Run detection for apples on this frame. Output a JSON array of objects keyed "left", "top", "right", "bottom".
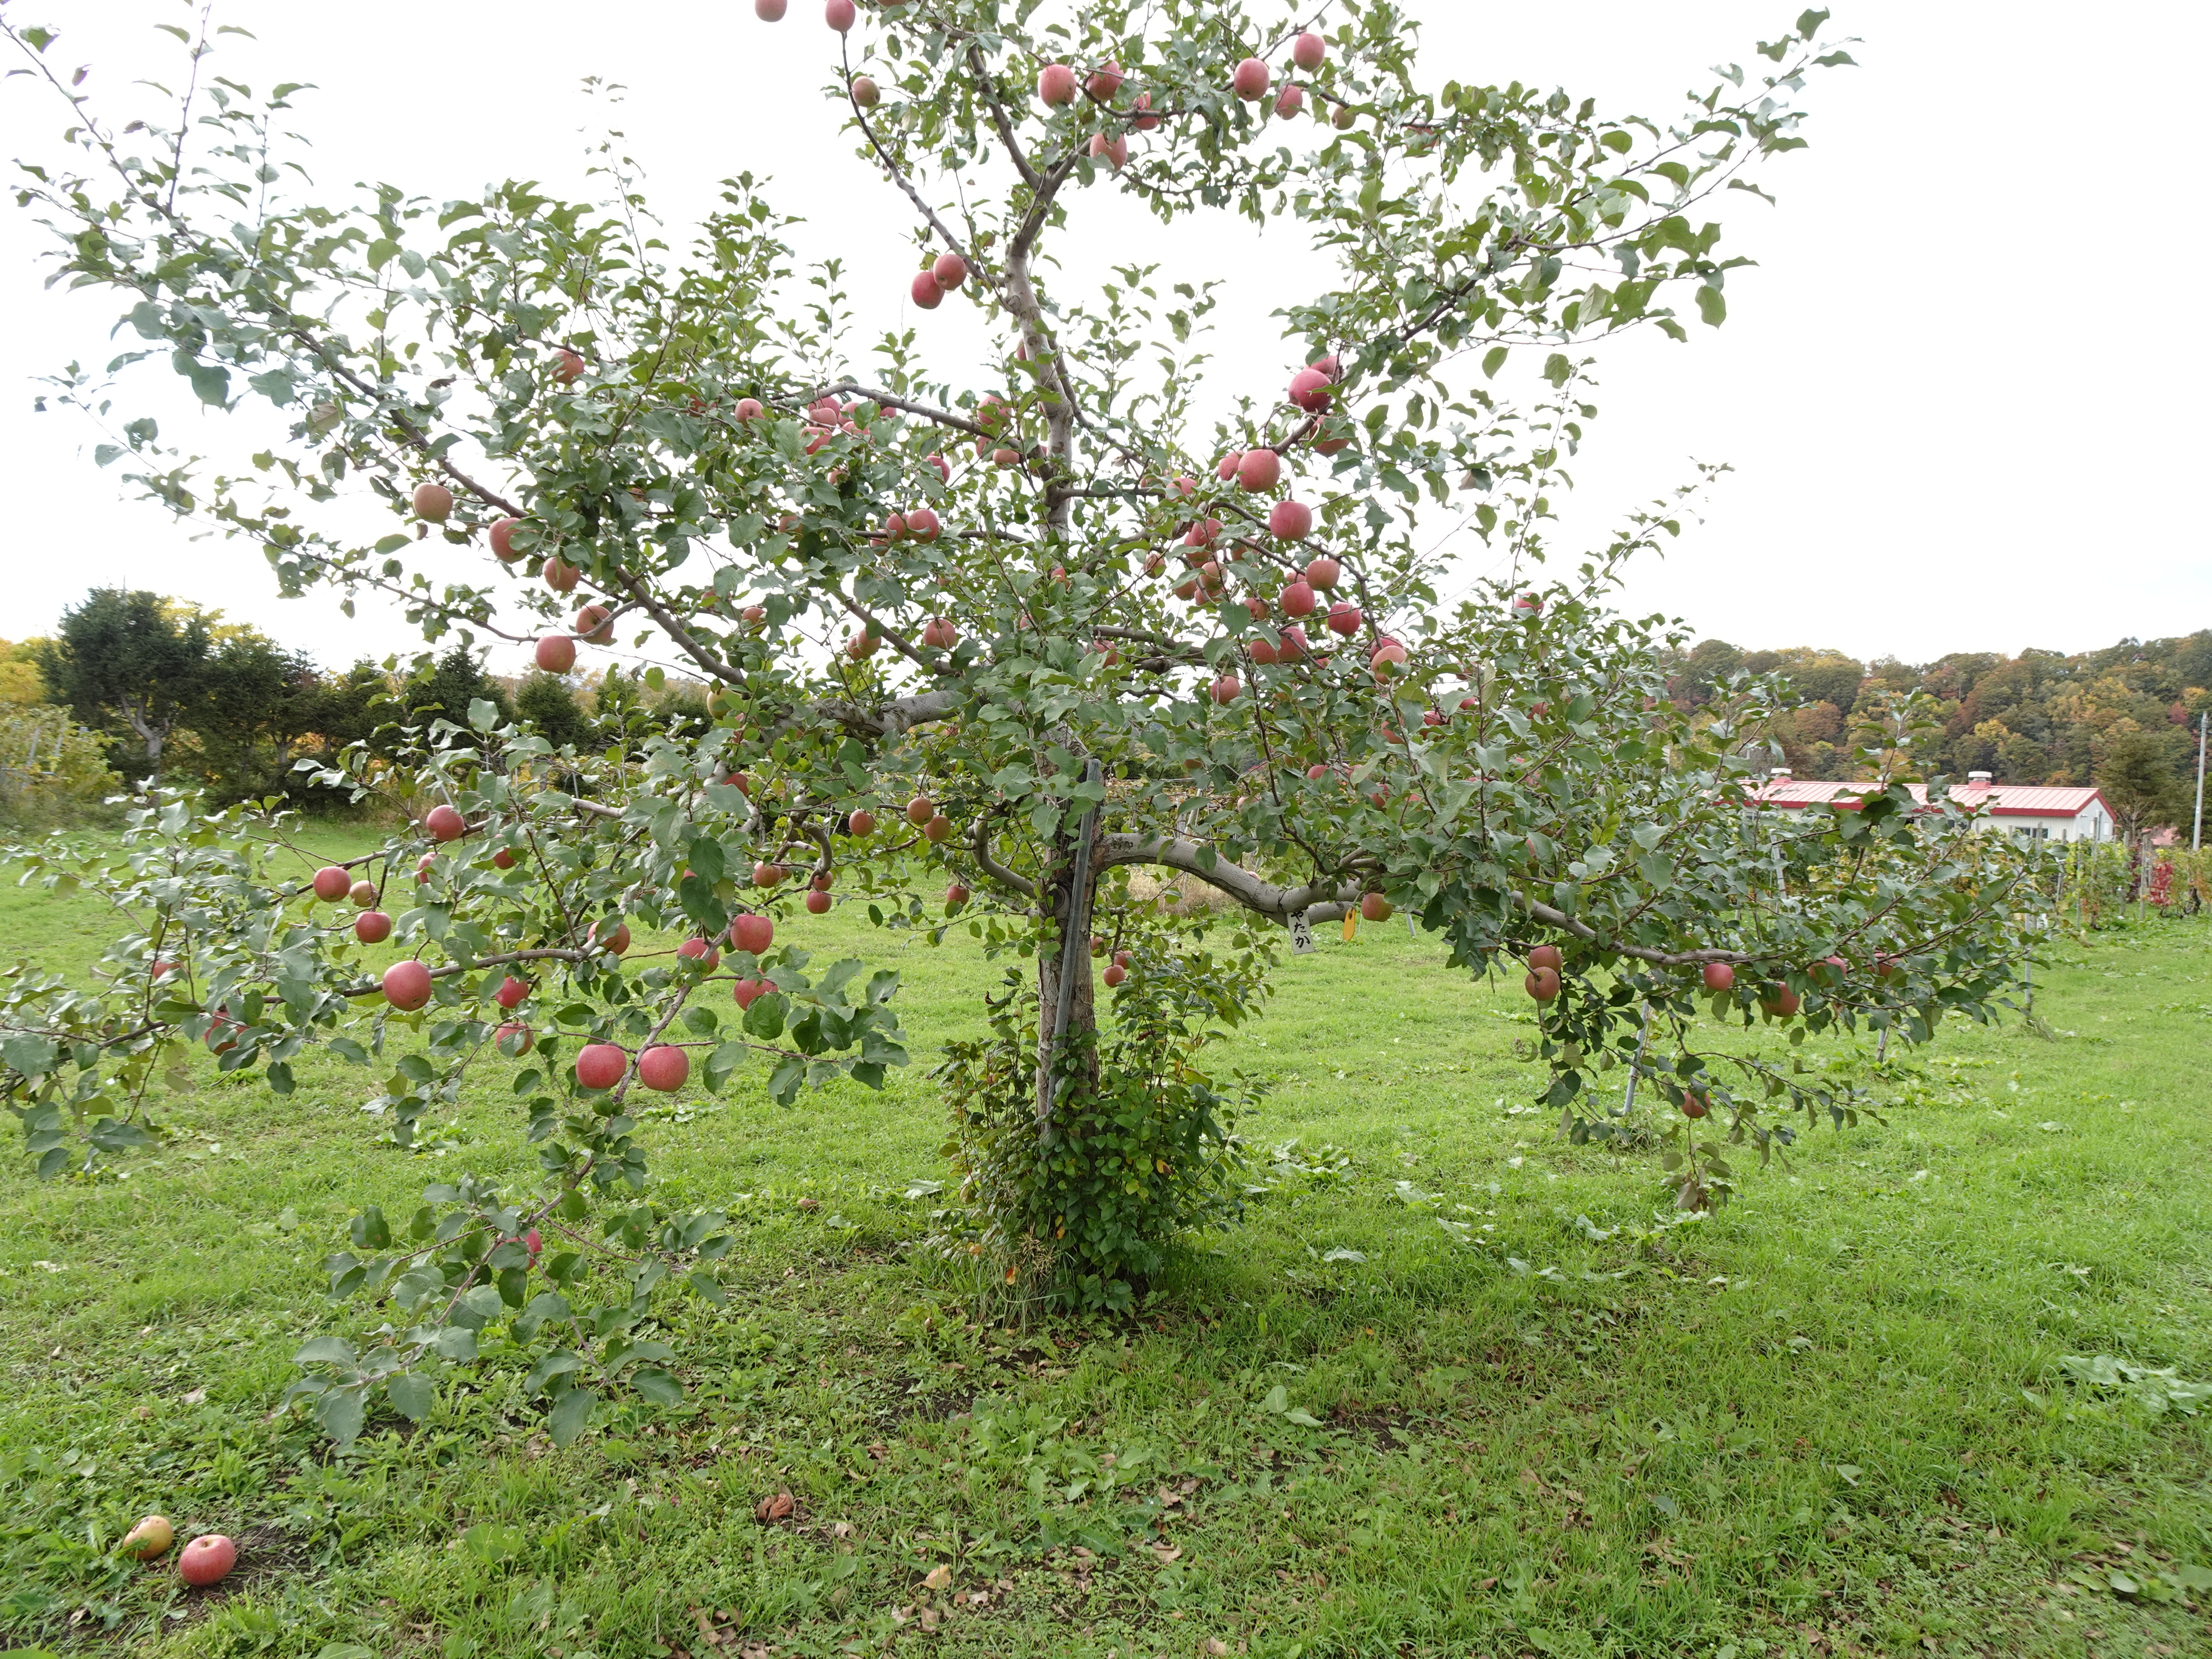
[
  {"left": 729, "top": 913, "right": 775, "bottom": 956},
  {"left": 841, "top": 419, "right": 872, "bottom": 447},
  {"left": 1276, "top": 625, "right": 1308, "bottom": 663},
  {"left": 922, "top": 619, "right": 956, "bottom": 656},
  {"left": 1306, "top": 763, "right": 1340, "bottom": 797},
  {"left": 1114, "top": 948, "right": 1137, "bottom": 972},
  {"left": 1764, "top": 980, "right": 1801, "bottom": 1017},
  {"left": 1381, "top": 710, "right": 1413, "bottom": 745},
  {"left": 799, "top": 425, "right": 831, "bottom": 458},
  {"left": 732, "top": 965, "right": 780, "bottom": 1014},
  {"left": 869, "top": 529, "right": 891, "bottom": 557},
  {"left": 1087, "top": 127, "right": 1128, "bottom": 173},
  {"left": 1088, "top": 933, "right": 1111, "bottom": 959},
  {"left": 1525, "top": 966, "right": 1561, "bottom": 1001},
  {"left": 1237, "top": 870, "right": 1262, "bottom": 891},
  {"left": 848, "top": 809, "right": 877, "bottom": 839},
  {"left": 1269, "top": 499, "right": 1313, "bottom": 541},
  {"left": 872, "top": 0, "right": 918, "bottom": 16},
  {"left": 1235, "top": 793, "right": 1262, "bottom": 822},
  {"left": 1271, "top": 687, "right": 1300, "bottom": 716},
  {"left": 151, "top": 959, "right": 188, "bottom": 985},
  {"left": 857, "top": 627, "right": 882, "bottom": 654},
  {"left": 1281, "top": 572, "right": 1312, "bottom": 594},
  {"left": 543, "top": 551, "right": 581, "bottom": 591},
  {"left": 1402, "top": 790, "right": 1424, "bottom": 815},
  {"left": 382, "top": 958, "right": 434, "bottom": 1011},
  {"left": 1281, "top": 739, "right": 1305, "bottom": 768},
  {"left": 1287, "top": 367, "right": 1333, "bottom": 418},
  {"left": 1183, "top": 757, "right": 1205, "bottom": 776},
  {"left": 1455, "top": 655, "right": 1478, "bottom": 682},
  {"left": 1050, "top": 564, "right": 1084, "bottom": 594},
  {"left": 1530, "top": 702, "right": 1555, "bottom": 724},
  {"left": 721, "top": 770, "right": 762, "bottom": 802},
  {"left": 688, "top": 390, "right": 719, "bottom": 419},
  {"left": 806, "top": 406, "right": 838, "bottom": 434},
  {"left": 536, "top": 635, "right": 576, "bottom": 673},
  {"left": 1305, "top": 558, "right": 1341, "bottom": 591},
  {"left": 1129, "top": 92, "right": 1164, "bottom": 131},
  {"left": 1366, "top": 783, "right": 1392, "bottom": 809},
  {"left": 490, "top": 832, "right": 527, "bottom": 870},
  {"left": 1330, "top": 103, "right": 1358, "bottom": 131},
  {"left": 1179, "top": 505, "right": 1230, "bottom": 554},
  {"left": 699, "top": 586, "right": 731, "bottom": 613},
  {"left": 586, "top": 918, "right": 632, "bottom": 960},
  {"left": 1272, "top": 82, "right": 1304, "bottom": 121},
  {"left": 1201, "top": 560, "right": 1228, "bottom": 593},
  {"left": 495, "top": 970, "right": 531, "bottom": 1008},
  {"left": 1232, "top": 57, "right": 1270, "bottom": 103},
  {"left": 840, "top": 400, "right": 868, "bottom": 427},
  {"left": 1510, "top": 757, "right": 1534, "bottom": 777},
  {"left": 905, "top": 507, "right": 941, "bottom": 544},
  {"left": 684, "top": 864, "right": 715, "bottom": 895},
  {"left": 1524, "top": 838, "right": 1553, "bottom": 863},
  {"left": 909, "top": 271, "right": 945, "bottom": 309},
  {"left": 776, "top": 513, "right": 806, "bottom": 544},
  {"left": 576, "top": 1043, "right": 628, "bottom": 1092},
  {"left": 754, "top": 0, "right": 789, "bottom": 23},
  {"left": 1453, "top": 694, "right": 1476, "bottom": 713},
  {"left": 1310, "top": 655, "right": 1330, "bottom": 675},
  {"left": 851, "top": 76, "right": 883, "bottom": 109},
  {"left": 1403, "top": 125, "right": 1438, "bottom": 158},
  {"left": 1219, "top": 450, "right": 1250, "bottom": 483},
  {"left": 1680, "top": 1085, "right": 1712, "bottom": 1120},
  {"left": 846, "top": 635, "right": 863, "bottom": 660},
  {"left": 1084, "top": 638, "right": 1118, "bottom": 671},
  {"left": 804, "top": 888, "right": 833, "bottom": 915},
  {"left": 1345, "top": 762, "right": 1369, "bottom": 789},
  {"left": 1036, "top": 391, "right": 1059, "bottom": 419},
  {"left": 1137, "top": 471, "right": 1160, "bottom": 497},
  {"left": 806, "top": 391, "right": 839, "bottom": 418},
  {"left": 672, "top": 937, "right": 720, "bottom": 977},
  {"left": 1512, "top": 591, "right": 1546, "bottom": 619},
  {"left": 426, "top": 804, "right": 464, "bottom": 843},
  {"left": 869, "top": 397, "right": 898, "bottom": 426},
  {"left": 705, "top": 687, "right": 737, "bottom": 721},
  {"left": 1084, "top": 57, "right": 1125, "bottom": 104},
  {"left": 1308, "top": 411, "right": 1354, "bottom": 458},
  {"left": 550, "top": 349, "right": 585, "bottom": 388},
  {"left": 917, "top": 454, "right": 950, "bottom": 486},
  {"left": 733, "top": 708, "right": 762, "bottom": 742},
  {"left": 639, "top": 1044, "right": 689, "bottom": 1093},
  {"left": 355, "top": 911, "right": 393, "bottom": 946},
  {"left": 1280, "top": 582, "right": 1317, "bottom": 618},
  {"left": 789, "top": 715, "right": 823, "bottom": 746},
  {"left": 1019, "top": 611, "right": 1046, "bottom": 636},
  {"left": 1308, "top": 352, "right": 1344, "bottom": 386},
  {"left": 1237, "top": 448, "right": 1281, "bottom": 494},
  {"left": 206, "top": 1008, "right": 250, "bottom": 1056},
  {"left": 1140, "top": 553, "right": 1167, "bottom": 581},
  {"left": 975, "top": 433, "right": 1002, "bottom": 464},
  {"left": 1164, "top": 476, "right": 1205, "bottom": 512},
  {"left": 416, "top": 851, "right": 452, "bottom": 891},
  {"left": 627, "top": 487, "right": 652, "bottom": 511},
  {"left": 822, "top": 0, "right": 857, "bottom": 34},
  {"left": 1230, "top": 535, "right": 1261, "bottom": 569},
  {"left": 1360, "top": 890, "right": 1395, "bottom": 922},
  {"left": 976, "top": 395, "right": 1013, "bottom": 429},
  {"left": 1326, "top": 600, "right": 1362, "bottom": 638},
  {"left": 1864, "top": 963, "right": 1893, "bottom": 991},
  {"left": 1703, "top": 961, "right": 1734, "bottom": 992},
  {"left": 1371, "top": 636, "right": 1403, "bottom": 659},
  {"left": 1027, "top": 445, "right": 1051, "bottom": 471},
  {"left": 576, "top": 603, "right": 614, "bottom": 646},
  {"left": 827, "top": 466, "right": 857, "bottom": 493},
  {"left": 940, "top": 722, "right": 962, "bottom": 745},
  {"left": 993, "top": 443, "right": 1019, "bottom": 471},
  {"left": 1038, "top": 63, "right": 1078, "bottom": 112},
  {"left": 905, "top": 796, "right": 934, "bottom": 826},
  {"left": 494, "top": 1227, "right": 542, "bottom": 1276},
  {"left": 1210, "top": 674, "right": 1241, "bottom": 707},
  {"left": 412, "top": 482, "right": 453, "bottom": 524},
  {"left": 488, "top": 516, "right": 531, "bottom": 566},
  {"left": 753, "top": 858, "right": 782, "bottom": 889},
  {"left": 1173, "top": 570, "right": 1198, "bottom": 603},
  {"left": 1370, "top": 644, "right": 1409, "bottom": 686},
  {"left": 938, "top": 564, "right": 965, "bottom": 588},
  {"left": 811, "top": 870, "right": 836, "bottom": 891},
  {"left": 1248, "top": 637, "right": 1280, "bottom": 668},
  {"left": 734, "top": 398, "right": 767, "bottom": 434},
  {"left": 1016, "top": 338, "right": 1043, "bottom": 366},
  {"left": 945, "top": 884, "right": 969, "bottom": 908},
  {"left": 1421, "top": 709, "right": 1448, "bottom": 736},
  {"left": 312, "top": 866, "right": 352, "bottom": 904},
  {"left": 1528, "top": 944, "right": 1566, "bottom": 977},
  {"left": 932, "top": 253, "right": 968, "bottom": 292},
  {"left": 740, "top": 604, "right": 770, "bottom": 636},
  {"left": 922, "top": 814, "right": 951, "bottom": 843},
  {"left": 1808, "top": 953, "right": 1848, "bottom": 992},
  {"left": 348, "top": 878, "right": 382, "bottom": 909},
  {"left": 1102, "top": 963, "right": 1126, "bottom": 989},
  {"left": 1291, "top": 32, "right": 1326, "bottom": 73},
  {"left": 1241, "top": 595, "right": 1272, "bottom": 629},
  {"left": 495, "top": 1022, "right": 534, "bottom": 1058},
  {"left": 884, "top": 513, "right": 912, "bottom": 542}
]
